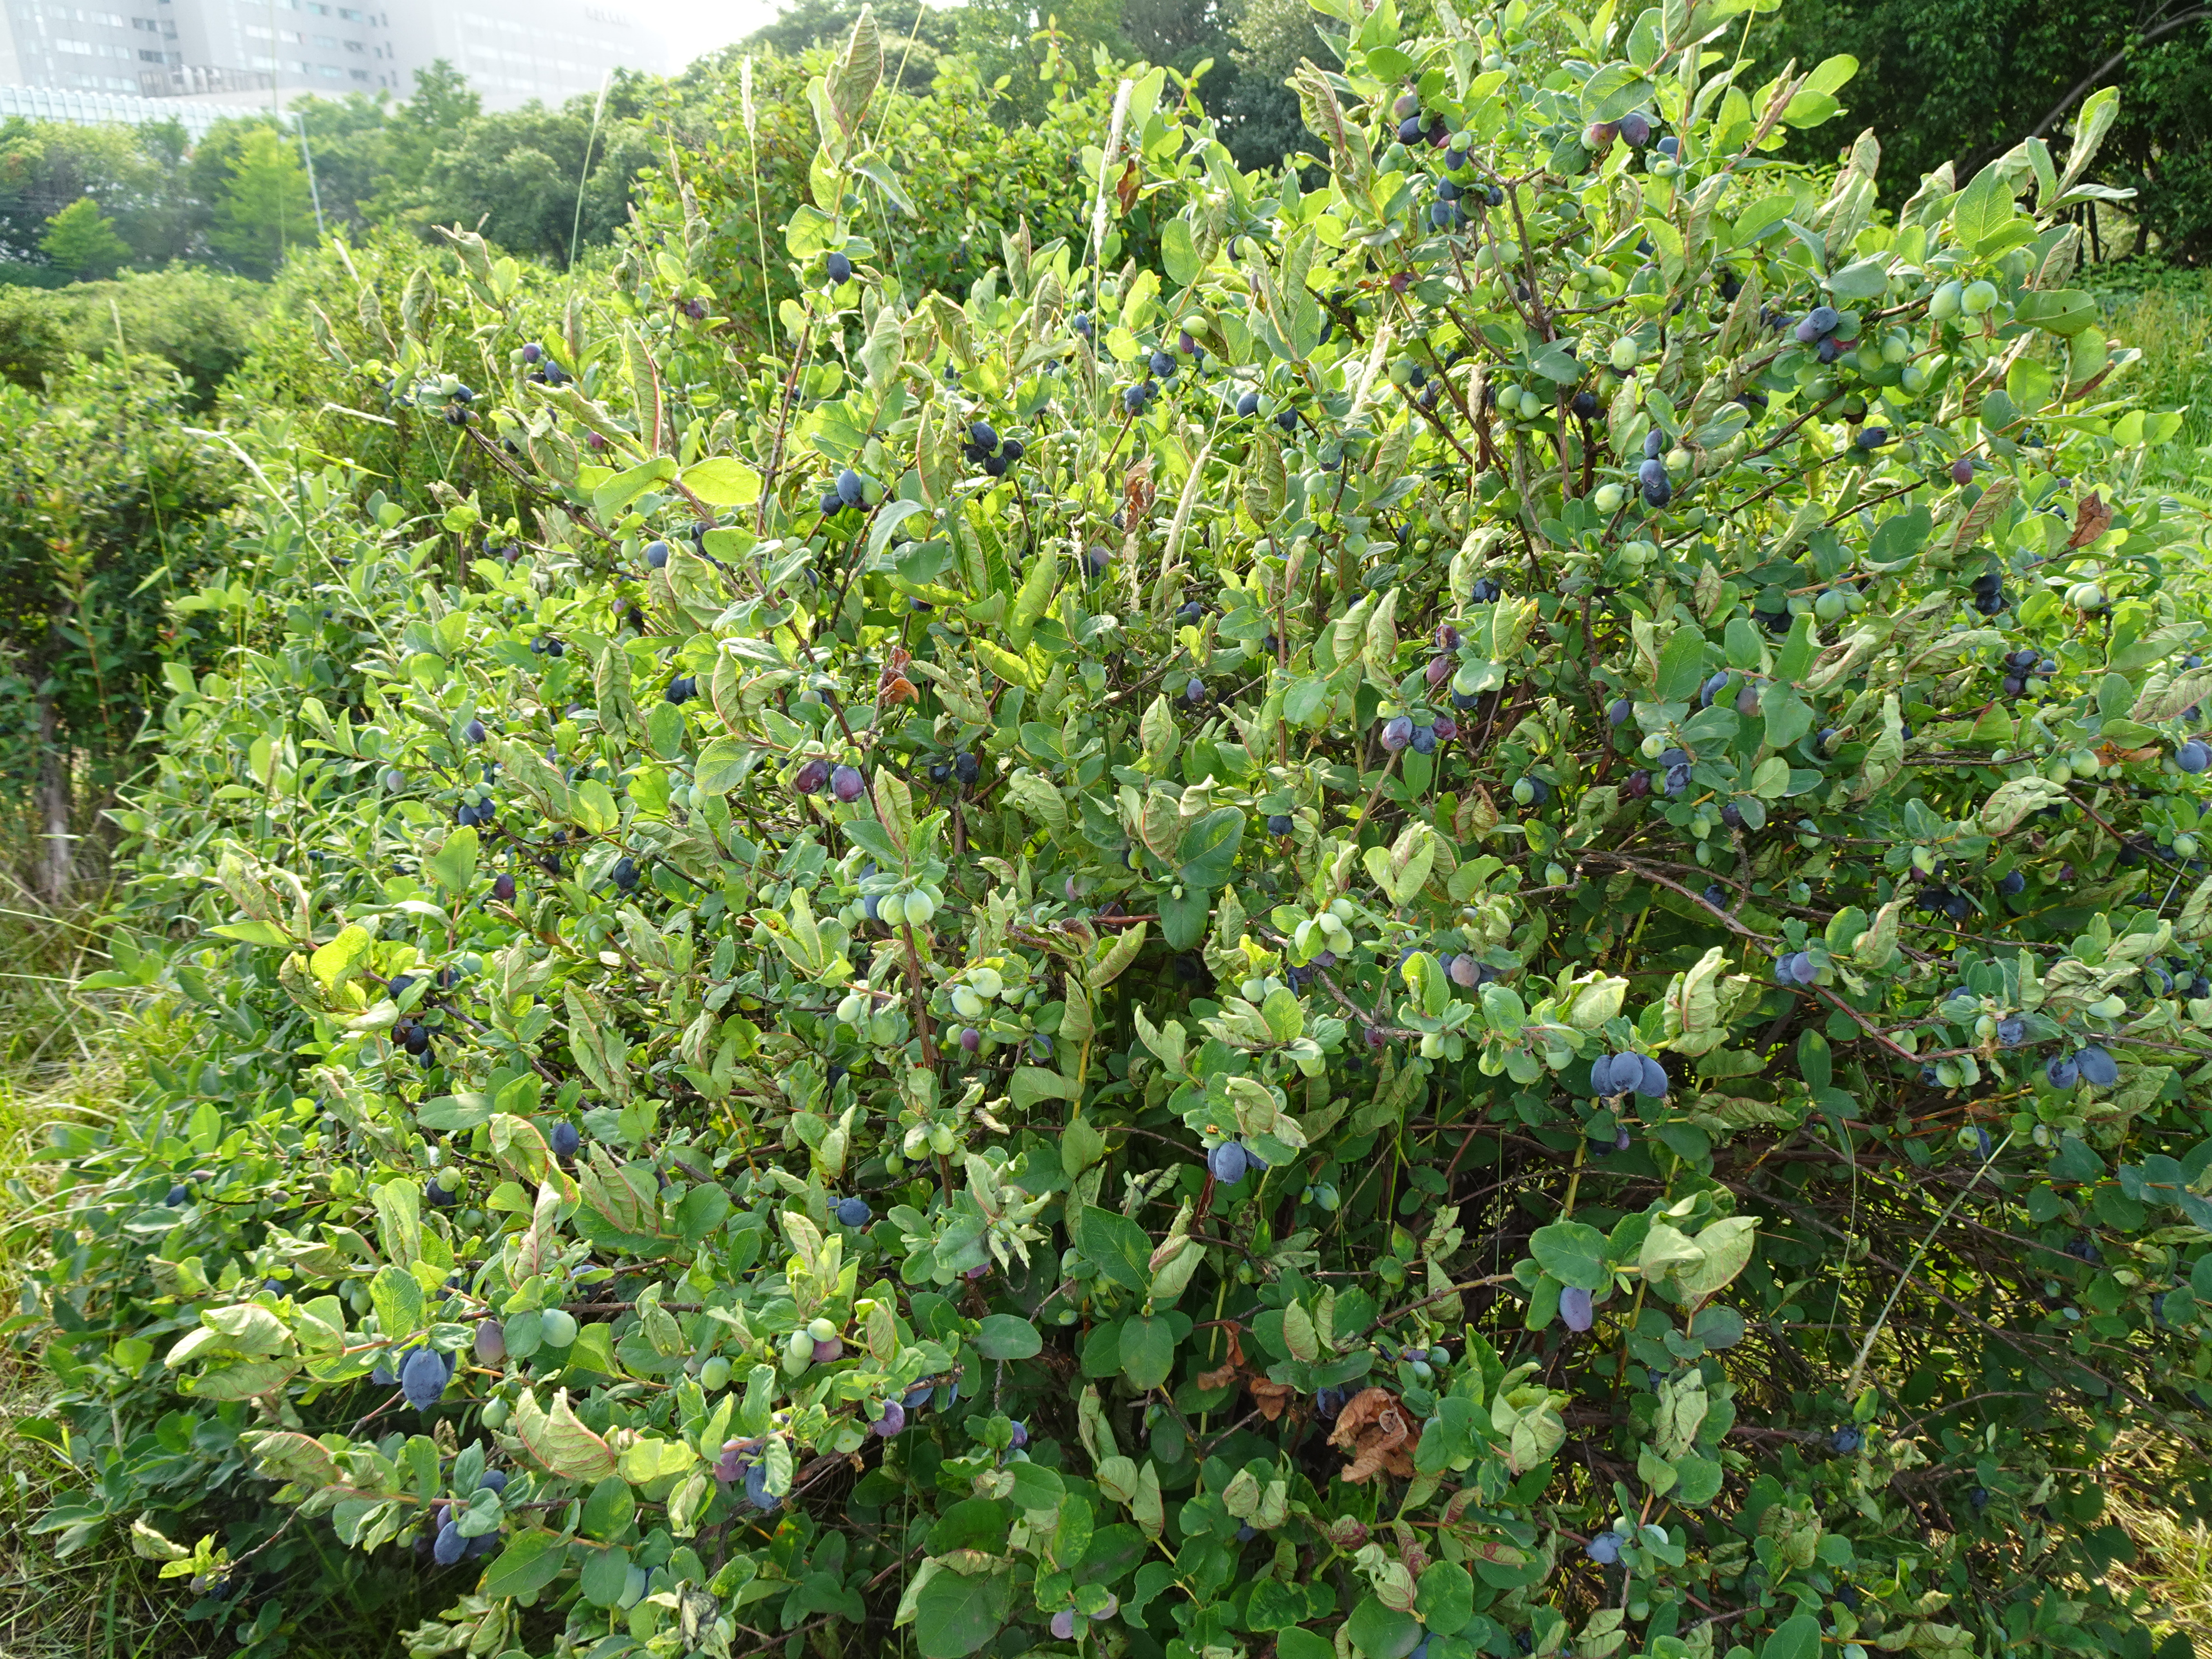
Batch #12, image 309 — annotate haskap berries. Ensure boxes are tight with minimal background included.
[836,1198,871,1226]
[2160,757,2181,776]
[1853,426,1890,451]
[799,690,822,710]
[1448,127,1477,157]
[1174,956,1198,980]
[1125,400,1146,417]
[837,994,862,1022]
[1315,287,1345,305]
[1837,545,1856,564]
[1399,523,1412,543]
[1682,506,1708,530]
[1556,1284,1595,1333]
[491,873,518,901]
[294,1261,311,1279]
[884,1150,905,1175]
[1078,323,1092,340]
[411,1535,428,1556]
[331,555,341,564]
[877,1139,893,1155]
[947,1379,960,1413]
[1444,141,1471,171]
[1236,386,1263,419]
[1700,672,1729,709]
[1227,237,1240,262]
[650,312,664,329]
[2156,843,2179,862]
[792,758,829,792]
[2173,833,2198,856]
[1889,327,1909,347]
[570,1265,602,1301]
[1529,777,1550,806]
[389,864,406,874]
[783,1343,813,1379]
[1794,361,1818,385]
[475,797,496,822]
[404,1025,429,1056]
[1005,459,1018,478]
[704,553,715,564]
[1511,775,1534,807]
[793,385,807,400]
[1003,440,1023,462]
[2045,1281,2061,1297]
[1773,951,1806,987]
[1250,273,1263,291]
[2152,1312,2167,1326]
[884,893,905,925]
[638,542,655,574]
[2039,693,2057,706]
[1237,1259,1253,1285]
[1183,315,1208,338]
[863,894,883,922]
[877,894,891,920]
[657,341,671,357]
[547,748,558,766]
[501,545,518,561]
[1436,625,1462,652]
[691,526,698,540]
[2009,767,2023,781]
[869,1012,898,1047]
[1504,383,1534,421]
[1075,315,1087,329]
[950,488,964,503]
[832,1417,863,1453]
[1718,1574,1736,1590]
[1748,390,1769,409]
[1536,193,1556,207]
[1569,272,1589,292]
[1408,1644,1430,1659]
[512,607,519,613]
[1194,344,1205,360]
[1817,337,1845,364]
[1618,559,1645,579]
[1898,1028,1917,1053]
[1775,316,1795,333]
[1025,990,1043,1007]
[398,1525,420,1547]
[1327,927,1352,955]
[483,766,496,785]
[2195,800,2209,818]
[773,757,782,769]
[1428,220,1438,234]
[596,913,615,931]
[1829,1424,1858,1454]
[416,384,431,405]
[166,1181,189,1209]
[944,364,955,380]
[1954,1056,1981,1085]
[1546,863,1568,887]
[2053,504,2069,521]
[1946,985,1971,1001]
[456,1271,484,1300]
[852,898,868,924]
[884,486,896,502]
[437,1460,453,1474]
[452,383,473,403]
[2176,742,2206,773]
[753,923,774,945]
[399,1347,450,1409]
[1605,1049,1641,1091]
[1335,335,1352,360]
[1696,841,1711,865]
[1805,378,1833,401]
[715,1436,759,1481]
[1389,360,1411,386]
[1298,805,1320,826]
[1857,340,1886,370]
[1856,578,1872,592]
[566,702,581,721]
[665,686,686,706]
[1956,764,1971,779]
[462,789,481,809]
[1438,949,1453,977]
[318,902,334,913]
[779,589,789,598]
[1902,367,1923,393]
[1843,402,1868,424]
[811,1335,844,1362]
[1588,265,1613,287]
[1638,540,1659,562]
[441,376,460,396]
[391,1016,417,1044]
[1594,483,1623,509]
[1167,366,1179,378]
[1634,1051,1672,1097]
[1962,276,1999,314]
[2110,985,2130,997]
[491,762,503,769]
[2145,954,2153,966]
[1992,748,2013,762]
[2143,966,2173,999]
[339,557,352,565]
[210,1576,229,1601]
[1424,653,1459,685]
[1720,800,1747,830]
[1243,978,1265,1003]
[436,965,460,988]
[1216,1142,1249,1185]
[450,952,482,975]
[2016,434,2042,449]
[1203,529,1212,548]
[1475,243,1494,271]
[1430,709,1460,740]
[589,924,605,943]
[1394,113,1426,144]
[1041,485,1050,493]
[1585,934,1604,954]
[904,1374,936,1408]
[1257,394,1273,418]
[1101,902,1124,934]
[439,1504,457,1532]
[544,359,564,384]
[191,1573,211,1596]
[1795,320,1823,343]
[1098,340,1107,350]
[613,857,641,889]
[904,889,933,927]
[503,438,519,454]
[1912,844,1936,876]
[1888,1030,1903,1043]
[1351,298,1374,316]
[1032,485,1042,507]
[2037,660,2057,676]
[874,1399,904,1438]
[1613,1127,1631,1150]
[1291,963,1314,983]
[1240,639,1262,660]
[553,831,567,842]
[1236,1523,1258,1543]
[1600,499,1626,514]
[820,493,844,516]
[1808,306,1839,334]
[670,784,691,809]
[1207,1145,1220,1173]
[2182,705,2201,722]
[269,1190,290,1204]
[849,854,867,876]
[685,299,705,318]
[481,1395,508,1431]
[1084,663,1107,691]
[1150,348,1179,377]
[1959,1125,1980,1151]
[2128,893,2148,905]
[790,1330,816,1359]
[1416,391,1427,402]
[1051,1605,1079,1640]
[1391,91,1423,121]
[699,1354,734,1391]
[1383,1344,1399,1363]
[1611,335,1640,371]
[918,883,944,912]
[1317,1384,1347,1419]
[1041,990,1047,1006]
[2167,955,2188,968]
[1312,951,1337,969]
[1471,576,1499,604]
[1349,599,1363,609]
[1264,633,1288,650]
[2101,778,2114,785]
[1814,586,1829,597]
[2074,1045,2120,1088]
[1180,526,1201,546]
[1382,716,1414,752]
[437,1165,463,1192]
[1104,1271,1118,1286]
[1377,154,1400,175]
[387,770,407,792]
[1286,972,1300,998]
[910,594,934,614]
[1101,280,1114,296]
[2075,1240,2102,1269]
[1733,685,1764,720]
[692,536,708,556]
[1629,769,1651,800]
[1641,1524,1669,1544]
[1720,272,1740,302]
[1561,1648,1571,1659]
[1901,726,1912,740]
[1009,496,1021,504]
[1428,198,1454,229]
[350,1283,373,1317]
[1320,912,1341,935]
[1423,1631,1437,1644]
[1171,343,1194,367]
[979,1032,996,1059]
[1127,848,1137,869]
[1951,459,1974,485]
[1516,285,1531,301]
[1654,161,1679,177]
[859,862,877,884]
[2074,584,2100,610]
[2025,676,2046,700]
[1495,241,1519,262]
[2010,248,2037,273]
[973,968,1003,999]
[1427,1344,1450,1367]
[1770,610,1794,634]
[1488,386,1499,408]
[1200,365,1213,378]
[1759,300,1777,328]
[948,1145,967,1166]
[1286,450,1303,471]
[2095,767,2109,781]
[545,851,561,876]
[1587,1050,1618,1095]
[1663,757,1693,796]
[1644,477,1670,507]
[1843,590,1866,612]
[1976,591,2007,613]
[538,1307,578,1349]
[546,408,557,424]
[530,638,546,653]
[1302,473,1325,494]
[1703,882,1728,912]
[1604,695,1636,727]
[483,536,504,555]
[617,1565,645,1612]
[1410,721,1437,753]
[1425,112,1450,146]
[2099,596,2112,613]
[927,1122,954,1155]
[835,469,868,508]
[1919,884,1943,910]
[2048,1057,2079,1089]
[2015,428,2031,443]
[1002,1421,1028,1446]
[1581,128,1599,151]
[476,1319,505,1364]
[425,1177,455,1205]
[776,1078,791,1095]
[1321,449,1344,472]
[1752,609,1778,623]
[386,379,395,393]
[1094,1271,1109,1295]
[1026,1034,1055,1059]
[524,343,541,364]
[684,676,699,696]
[1640,426,1667,460]
[1318,319,1331,348]
[1389,142,1404,160]
[1612,1515,1637,1540]
[2036,555,2043,563]
[1436,177,1464,203]
[1234,233,1248,258]
[715,560,725,572]
[984,455,1006,478]
[1181,555,1192,568]
[2047,757,2071,785]
[837,906,858,930]
[1838,572,1863,587]
[546,639,564,658]
[971,424,996,451]
[587,430,605,450]
[1265,975,1283,997]
[2087,994,2126,1019]
[1622,540,1646,565]
[1396,947,1422,971]
[1177,205,1192,220]
[1423,380,1443,405]
[459,803,479,827]
[1183,601,1204,624]
[527,371,546,385]
[744,1455,781,1509]
[2184,857,2202,872]
[1451,212,1467,231]
[1447,952,1483,988]
[1060,1309,1079,1326]
[1493,272,1514,299]
[1404,361,1428,387]
[826,1065,852,1091]
[1670,294,1685,316]
[551,1120,580,1156]
[2123,784,2140,799]
[187,1169,216,1183]
[2069,748,2101,779]
[519,605,528,613]
[1789,882,1812,906]
[612,598,627,618]
[1591,120,1616,147]
[1216,690,1234,708]
[966,1259,988,1280]
[1429,464,1443,482]
[465,410,481,427]
[2039,863,2059,885]
[441,1348,457,1383]
[1061,1247,1082,1277]
[323,610,333,619]
[446,407,466,425]
[1922,1062,1943,1087]
[1797,817,1824,848]
[1480,962,1505,976]
[386,973,422,1003]
[1179,329,1195,354]
[1414,538,1431,553]
[1998,868,2025,895]
[1974,1127,1990,1161]
[813,250,828,273]
[1587,1136,1614,1159]
[1081,553,1100,578]
[1086,1593,1119,1622]
[1781,950,1820,986]
[1655,748,1694,766]
[780,757,791,769]
[1276,407,1302,432]
[549,713,556,725]
[1474,971,1493,992]
[1349,594,1362,605]
[1066,875,1079,902]
[1816,590,1846,619]
[2005,649,2039,676]
[1832,863,1851,885]
[824,253,854,284]
[565,765,577,785]
[420,1050,436,1070]
[2106,762,2123,778]
[1691,812,1710,839]
[1420,394,1430,410]
[1639,260,1660,276]
[1047,359,1059,377]
[1940,889,1973,924]
[2184,656,2203,669]
[426,1021,443,1036]
[753,760,765,773]
[831,764,866,804]
[2128,830,2152,851]
[1402,1344,1427,1362]
[2003,672,2028,697]
[2161,888,2179,902]
[1831,333,1859,352]
[509,348,526,366]
[928,762,953,783]
[1638,459,1668,489]
[1388,273,1418,293]
[1343,532,1368,557]
[647,541,669,567]
[859,473,883,505]
[1892,443,1914,464]
[2185,1388,2207,1411]
[784,536,802,551]
[1280,447,1293,459]
[1975,1014,1997,1041]
[1997,1017,2027,1049]
[1700,804,1723,827]
[1616,110,1655,149]
[1909,863,1927,882]
[1933,860,1946,877]
[436,1276,460,1301]
[1313,1180,1340,1213]
[2059,864,2075,881]
[857,497,873,513]
[265,1279,287,1299]
[695,521,711,536]
[621,534,639,561]
[758,884,776,903]
[1989,691,1995,701]
[1451,686,1479,711]
[1203,353,1217,374]
[1598,926,1615,949]
[2116,843,2138,866]
[826,1196,840,1209]
[1166,378,1179,394]
[1667,447,1691,471]
[628,605,643,623]
[1835,1583,1861,1609]
[1825,393,1847,414]
[1971,1485,1988,1510]
[1560,202,1578,220]
[2023,760,2037,777]
[2065,582,2093,604]
[1302,1186,1314,1205]
[820,690,836,708]
[1571,390,1603,418]
[1588,1530,1623,1566]
[307,850,325,862]
[315,1098,327,1114]
[688,783,708,809]
[1702,513,1719,537]
[1635,239,1656,255]
[1173,606,1183,617]
[965,447,989,464]
[670,673,686,697]
[1445,349,1461,369]
[1141,380,1159,399]
[2153,1293,2168,1315]
[1483,184,1504,206]
[1655,137,1682,154]
[1786,595,1812,617]
[1246,1150,1268,1173]
[1881,336,1906,364]
[1609,364,1637,379]
[1411,1361,1432,1381]
[1091,547,1110,567]
[1475,20,1494,38]
[1278,554,1300,586]
[811,568,820,585]
[1483,55,1503,74]
[474,781,493,799]
[901,1124,932,1159]
[808,1318,837,1342]
[850,979,871,998]
[957,1025,981,1053]
[1001,1240,1010,1252]
[338,1278,355,1300]
[1125,386,1146,406]
[466,720,487,744]
[1936,1060,1962,1089]
[682,540,697,556]
[2182,976,2209,999]
[1185,208,1192,220]
[433,1517,470,1567]
[869,990,893,1017]
[1121,847,1138,872]
[1971,574,2003,595]
[786,566,802,582]
[1518,385,1548,421]
[2149,795,2163,812]
[990,436,1004,457]
[1733,390,1754,427]
[1266,812,1296,837]
[1929,279,1964,323]
[804,568,816,588]
[400,393,415,408]
[1626,1597,1649,1621]
[375,764,392,788]
[954,750,982,783]
[1501,61,1518,77]
[2056,476,2069,488]
[2033,1124,2049,1147]
[321,1120,334,1135]
[950,985,983,1019]
[1453,197,1474,222]
[2174,971,2192,990]
[1231,531,1246,543]
[947,385,960,392]
[2188,739,2212,769]
[372,1340,419,1388]
[1668,153,1677,160]
[1186,677,1210,703]
[480,1467,507,1494]
[1841,1643,1868,1659]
